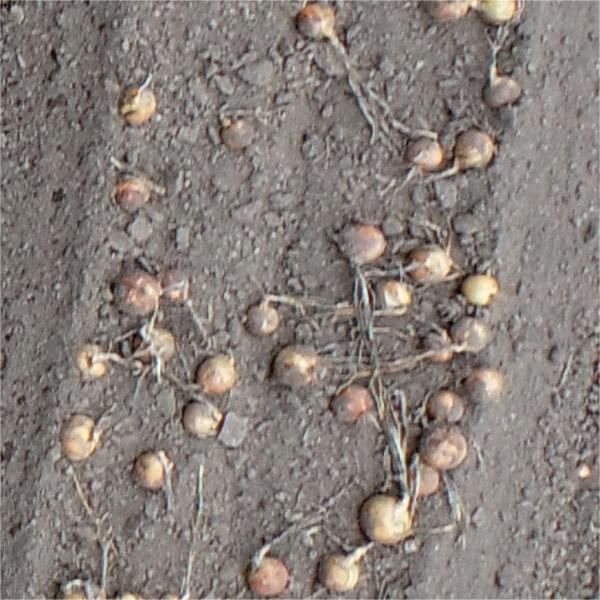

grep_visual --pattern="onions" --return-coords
[195,353,234,392]
[377,278,411,311]
[144,325,175,365]
[423,327,454,362]
[413,466,441,497]
[455,128,494,169]
[273,343,321,390]
[161,275,189,303]
[131,449,169,488]
[73,343,107,378]
[59,417,99,460]
[422,428,467,469]
[119,271,160,314]
[359,494,410,541]
[429,0,470,23]
[243,301,277,335]
[478,0,518,24]
[295,3,336,40]
[247,558,289,595]
[217,109,253,150]
[331,384,371,422]
[426,386,461,420]
[406,133,444,171]
[59,577,103,598]
[341,221,384,262]
[467,367,504,401]
[112,175,148,211]
[449,316,490,353]
[180,398,219,437]
[406,245,451,282]
[483,75,519,108]
[461,271,497,306]
[318,551,363,590]
[115,83,154,123]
